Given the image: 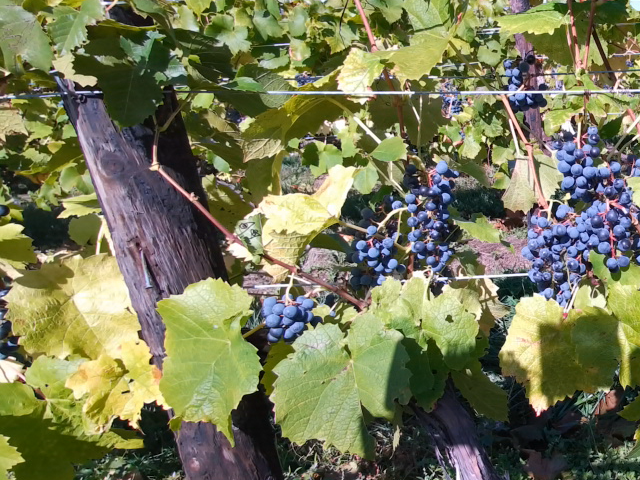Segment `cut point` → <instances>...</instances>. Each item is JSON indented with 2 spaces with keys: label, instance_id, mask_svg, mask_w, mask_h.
<instances>
[{
  "label": "cut point",
  "instance_id": "1",
  "mask_svg": "<svg viewBox=\"0 0 640 480\" xmlns=\"http://www.w3.org/2000/svg\"><path fill=\"white\" fill-rule=\"evenodd\" d=\"M409 156H410L411 158L416 159V160L420 163L421 167H422V168H425V164H424L423 160L419 158V156H417V155H409Z\"/></svg>",
  "mask_w": 640,
  "mask_h": 480
}]
</instances>
